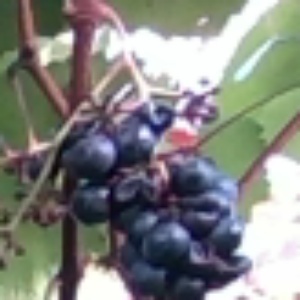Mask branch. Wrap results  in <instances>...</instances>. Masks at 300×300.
<instances>
[{"mask_svg":"<svg viewBox=\"0 0 300 300\" xmlns=\"http://www.w3.org/2000/svg\"><path fill=\"white\" fill-rule=\"evenodd\" d=\"M300 129V112L275 136L274 140L266 146L256 160L248 167L245 174L237 181L241 188H249L259 172L270 161L272 156L281 151L290 138Z\"/></svg>","mask_w":300,"mask_h":300,"instance_id":"2","label":"branch"},{"mask_svg":"<svg viewBox=\"0 0 300 300\" xmlns=\"http://www.w3.org/2000/svg\"><path fill=\"white\" fill-rule=\"evenodd\" d=\"M101 4V0H66L62 6V15L71 27V78L67 98L49 70L40 64L33 0H18V56L10 61L4 71L10 91L27 124L28 147L12 151L0 136V147L6 153L0 155V166L18 167L21 182L31 190L19 205L11 223L0 225V233L12 232L17 227L23 212L41 191L52 170L63 167L61 268L55 275L59 283L58 300H76V284L83 276V264L78 254V220L69 205L70 195L79 185L80 178L73 176L62 164L60 152L63 140L82 128V109L89 98L92 37L101 24ZM20 71H29L51 109L62 118L63 126L54 134L52 141H37L24 88L16 74ZM45 152H49L47 159L32 181L30 165L36 164Z\"/></svg>","mask_w":300,"mask_h":300,"instance_id":"1","label":"branch"}]
</instances>
